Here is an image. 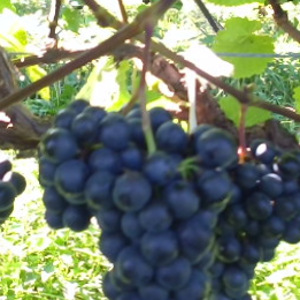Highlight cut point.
<instances>
[{
  "label": "cut point",
  "mask_w": 300,
  "mask_h": 300,
  "mask_svg": "<svg viewBox=\"0 0 300 300\" xmlns=\"http://www.w3.org/2000/svg\"><path fill=\"white\" fill-rule=\"evenodd\" d=\"M154 36V23L145 29V39L142 41L143 44V59H142V75L140 83L133 96L130 97L131 102H135L141 95V106L146 105L147 99V69L151 63L152 57V41Z\"/></svg>",
  "instance_id": "obj_1"
}]
</instances>
